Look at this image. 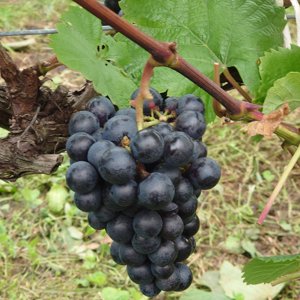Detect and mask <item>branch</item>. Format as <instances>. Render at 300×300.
<instances>
[{
	"instance_id": "2",
	"label": "branch",
	"mask_w": 300,
	"mask_h": 300,
	"mask_svg": "<svg viewBox=\"0 0 300 300\" xmlns=\"http://www.w3.org/2000/svg\"><path fill=\"white\" fill-rule=\"evenodd\" d=\"M274 133L286 143L300 148V132L290 124L281 122L274 130Z\"/></svg>"
},
{
	"instance_id": "1",
	"label": "branch",
	"mask_w": 300,
	"mask_h": 300,
	"mask_svg": "<svg viewBox=\"0 0 300 300\" xmlns=\"http://www.w3.org/2000/svg\"><path fill=\"white\" fill-rule=\"evenodd\" d=\"M72 1L99 18L103 25H109L117 32H120L138 44L156 59L164 62L165 67L179 72L205 93L211 95L213 97L214 111L218 117L230 118L233 122L260 121L263 118V113L258 110L256 104L240 101L230 95L204 73H201L181 57L176 42L163 43L155 40L119 16L116 12L107 8L105 5H100L95 0Z\"/></svg>"
}]
</instances>
